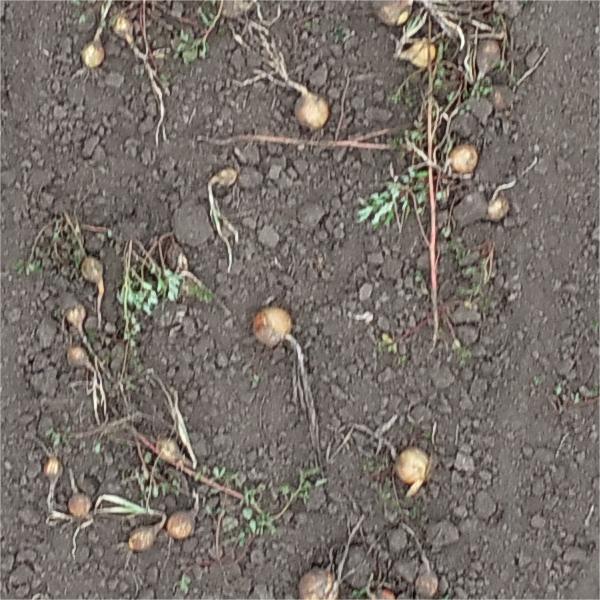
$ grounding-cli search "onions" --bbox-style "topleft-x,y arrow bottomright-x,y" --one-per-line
293,92 -> 328,128
66,493 -> 90,516
297,568 -> 337,599
413,39 -> 436,69
78,40 -> 105,66
213,0 -> 255,19
393,446 -> 430,483
249,305 -> 291,344
379,2 -> 408,25
128,523 -> 155,550
483,191 -> 509,219
61,303 -> 85,328
412,571 -> 441,599
156,436 -> 183,467
374,581 -> 394,599
37,455 -> 59,474
489,85 -> 513,110
79,257 -> 100,281
165,510 -> 193,538
111,13 -> 131,40
473,42 -> 502,73
448,143 -> 478,172
210,164 -> 238,190
64,343 -> 87,365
